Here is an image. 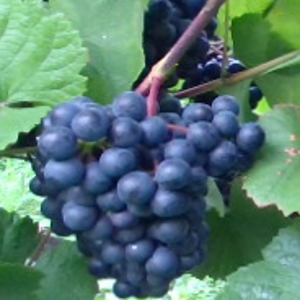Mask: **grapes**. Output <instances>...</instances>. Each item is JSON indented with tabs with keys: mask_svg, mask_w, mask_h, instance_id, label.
<instances>
[{
	"mask_svg": "<svg viewBox=\"0 0 300 300\" xmlns=\"http://www.w3.org/2000/svg\"><path fill=\"white\" fill-rule=\"evenodd\" d=\"M125 91L109 105L79 96L43 120L29 191L59 235L77 233L93 254L95 277L117 276L119 298L162 294L168 280L205 259L210 228L201 222L208 174L247 171L250 153L264 144L259 123L239 125L240 101L218 96L188 107Z\"/></svg>",
	"mask_w": 300,
	"mask_h": 300,
	"instance_id": "obj_1",
	"label": "grapes"
}]
</instances>
